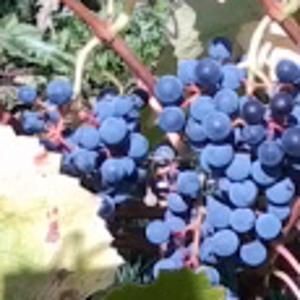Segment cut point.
Masks as SVG:
<instances>
[{
    "label": "cut point",
    "instance_id": "obj_1",
    "mask_svg": "<svg viewBox=\"0 0 300 300\" xmlns=\"http://www.w3.org/2000/svg\"><path fill=\"white\" fill-rule=\"evenodd\" d=\"M272 21V17L270 15H267L262 22L260 23L259 27L257 28L256 32L254 33L252 43L250 46V52H249V66L247 69V77L249 79H252L254 77V72L256 68V54L257 49L259 46L260 38L263 34V32L266 30V27L268 24Z\"/></svg>",
    "mask_w": 300,
    "mask_h": 300
},
{
    "label": "cut point",
    "instance_id": "obj_2",
    "mask_svg": "<svg viewBox=\"0 0 300 300\" xmlns=\"http://www.w3.org/2000/svg\"><path fill=\"white\" fill-rule=\"evenodd\" d=\"M103 38L101 36L94 37L91 41L87 43V45L81 50L79 55L76 58L75 62V80L73 85L80 86L82 83V65L83 61L88 55V53L93 49L94 46L101 43Z\"/></svg>",
    "mask_w": 300,
    "mask_h": 300
}]
</instances>
